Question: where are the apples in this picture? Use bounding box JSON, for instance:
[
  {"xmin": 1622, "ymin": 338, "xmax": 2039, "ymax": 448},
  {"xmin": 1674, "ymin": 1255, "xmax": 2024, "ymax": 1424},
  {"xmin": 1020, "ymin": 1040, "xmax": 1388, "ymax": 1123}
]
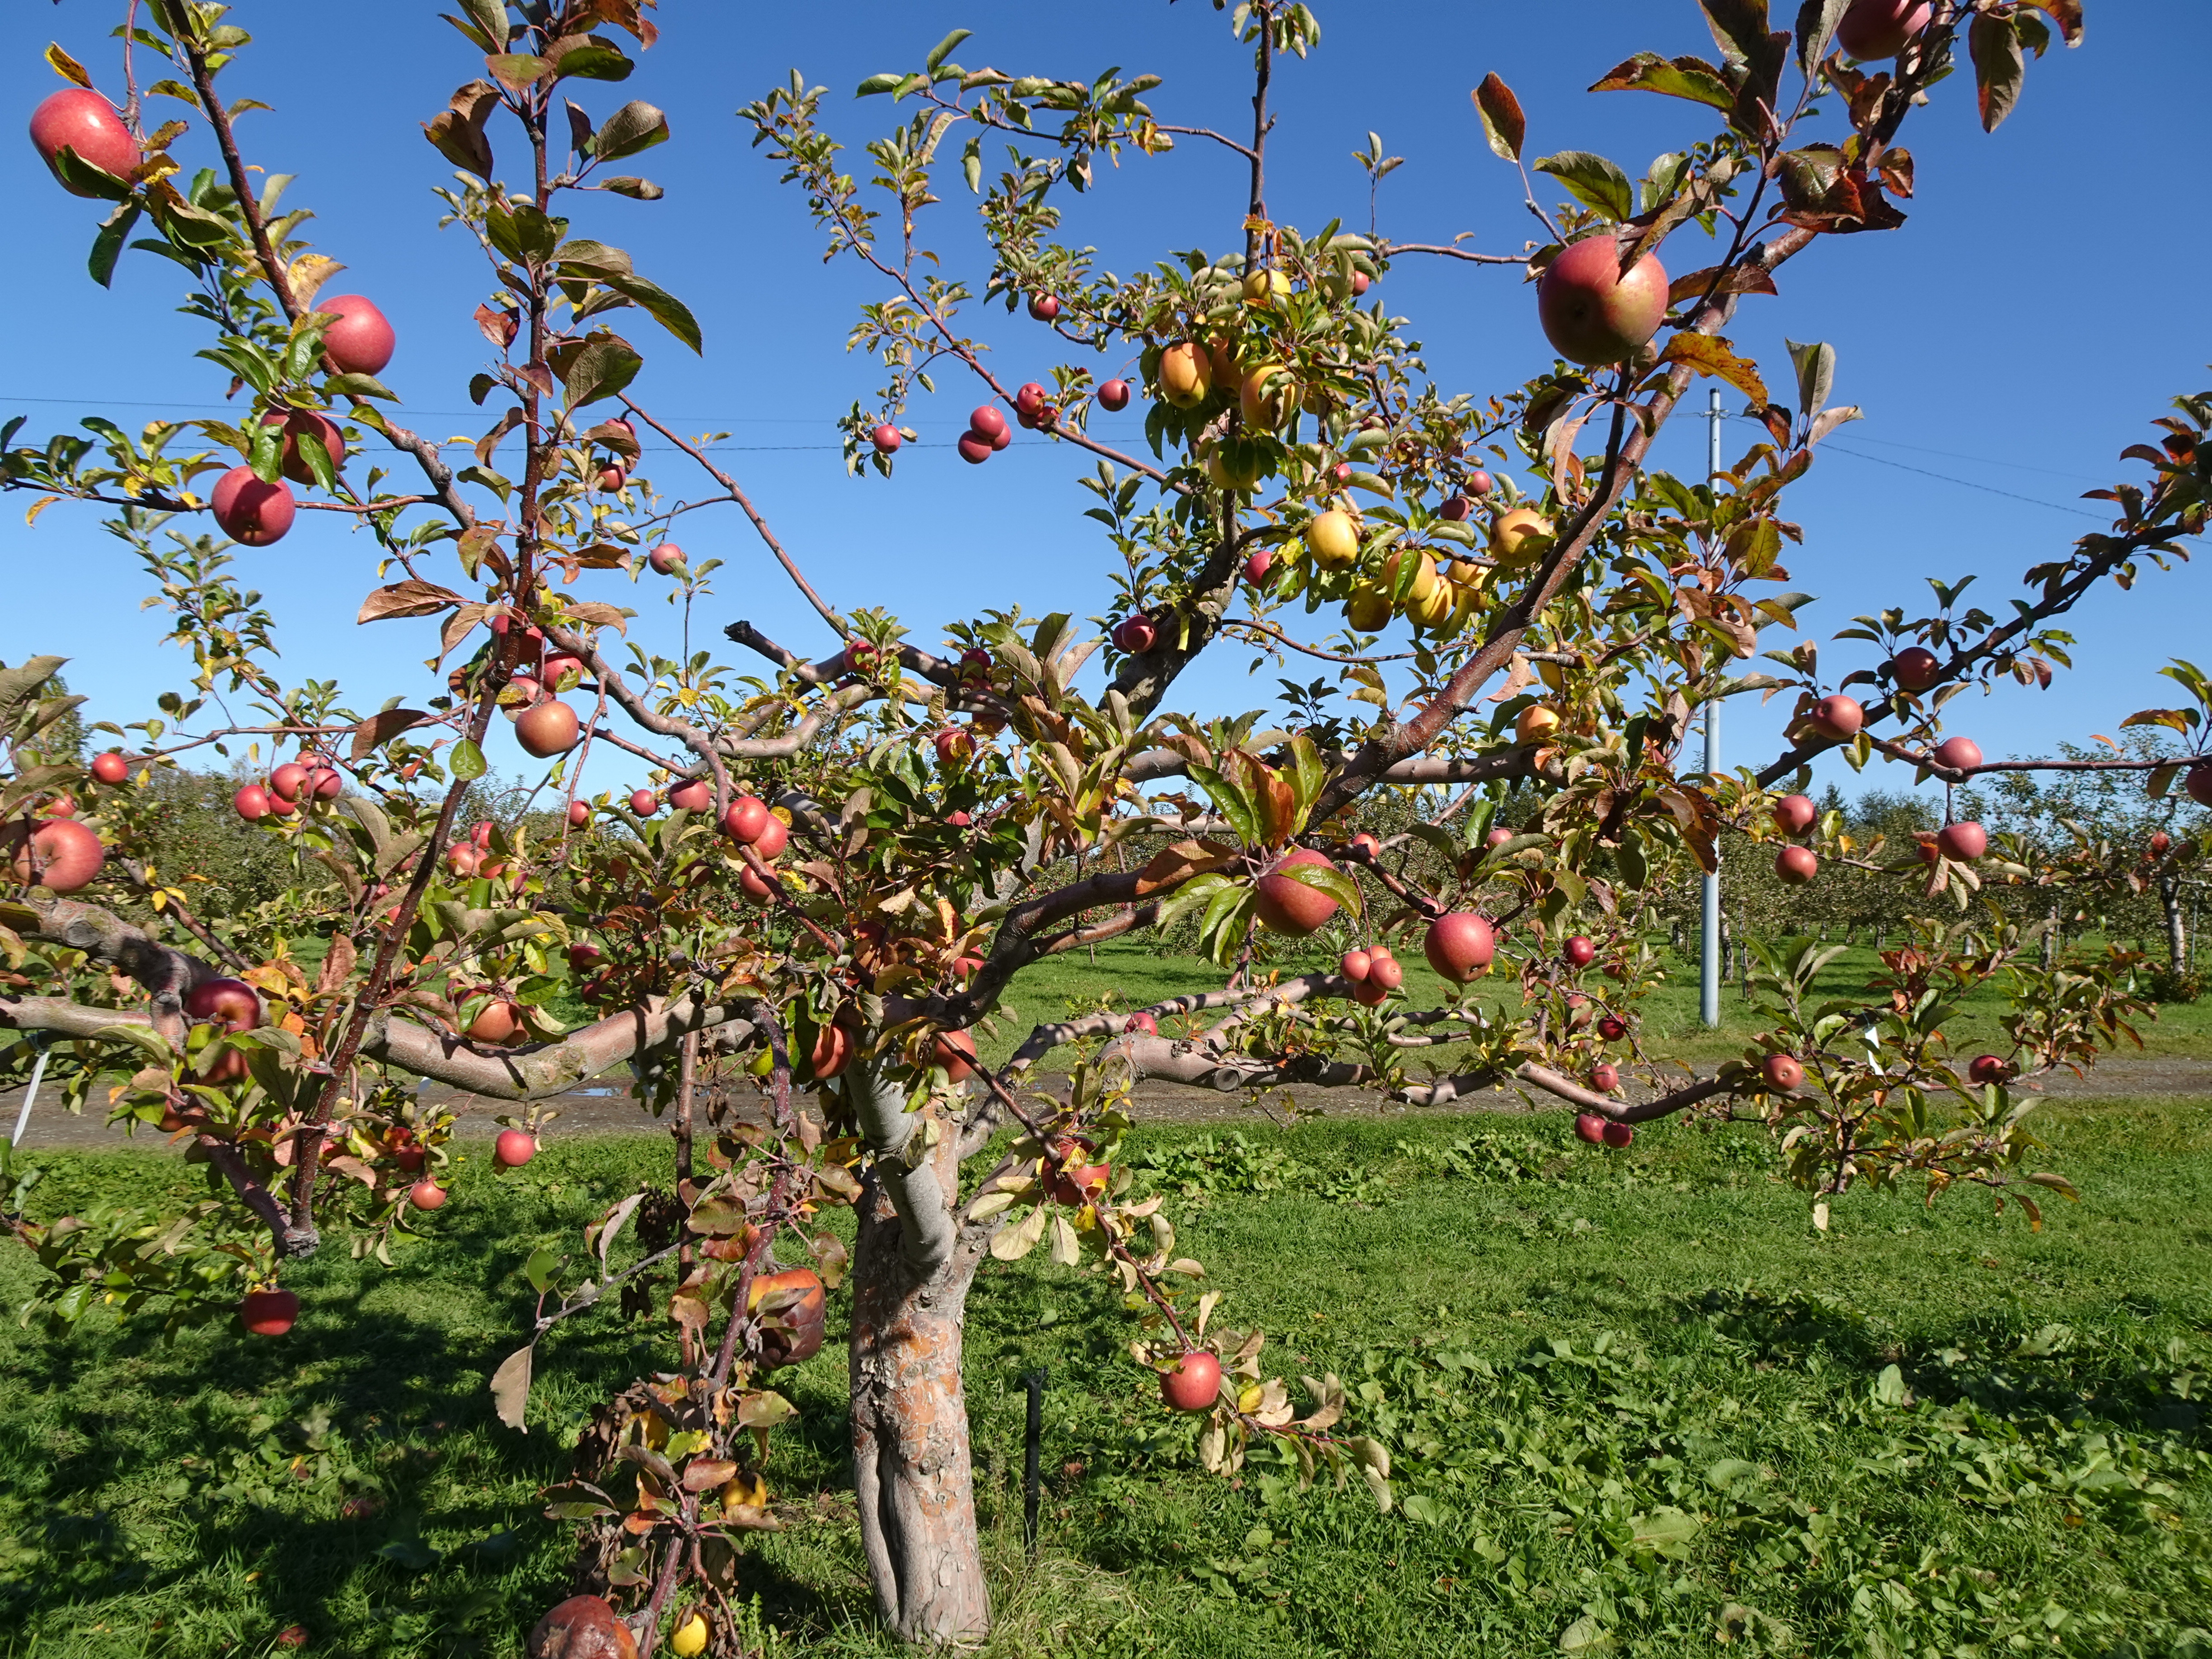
[
  {"xmin": 571, "ymin": 877, "xmax": 601, "ymax": 902},
  {"xmin": 400, "ymin": 852, "xmax": 416, "ymax": 872},
  {"xmin": 953, "ymin": 946, "xmax": 984, "ymax": 982},
  {"xmin": 1256, "ymin": 849, "xmax": 1339, "ymax": 938},
  {"xmin": 960, "ymin": 678, "xmax": 992, "ymax": 692},
  {"xmin": 515, "ymin": 701, "xmax": 579, "ymax": 758},
  {"xmin": 739, "ymin": 862, "xmax": 778, "ymax": 898},
  {"xmin": 1574, "ymin": 1113, "xmax": 1606, "ymax": 1144},
  {"xmin": 201, "ymin": 1048, "xmax": 251, "ymax": 1085},
  {"xmin": 1017, "ymin": 409, "xmax": 1039, "ymax": 429},
  {"xmin": 1307, "ymin": 510, "xmax": 1358, "ymax": 570},
  {"xmin": 1027, "ymin": 290, "xmax": 1058, "ymax": 321},
  {"xmin": 446, "ymin": 979, "xmax": 466, "ymax": 1006},
  {"xmin": 1098, "ymin": 379, "xmax": 1130, "ymax": 412},
  {"xmin": 1562, "ymin": 936, "xmax": 1594, "ymax": 969},
  {"xmin": 725, "ymin": 1472, "xmax": 766, "ymax": 1506},
  {"xmin": 1415, "ymin": 897, "xmax": 1449, "ymax": 914},
  {"xmin": 1811, "ymin": 695, "xmax": 1862, "ymax": 740},
  {"xmin": 1934, "ymin": 737, "xmax": 1982, "ymax": 783},
  {"xmin": 856, "ymin": 920, "xmax": 886, "ymax": 951},
  {"xmin": 1538, "ymin": 235, "xmax": 1676, "ymax": 366},
  {"xmin": 183, "ymin": 978, "xmax": 260, "ymax": 1035},
  {"xmin": 721, "ymin": 1483, "xmax": 761, "ymax": 1515},
  {"xmin": 1386, "ymin": 552, "xmax": 1436, "ymax": 606},
  {"xmin": 593, "ymin": 462, "xmax": 626, "ymax": 493},
  {"xmin": 269, "ymin": 791, "xmax": 298, "ymax": 816},
  {"xmin": 240, "ymin": 1288, "xmax": 299, "ymax": 1335},
  {"xmin": 946, "ymin": 811, "xmax": 970, "ymax": 826},
  {"xmin": 669, "ymin": 779, "xmax": 710, "ymax": 816},
  {"xmin": 500, "ymin": 1002, "xmax": 537, "ymax": 1046},
  {"xmin": 1124, "ymin": 1012, "xmax": 1157, "ymax": 1036},
  {"xmin": 649, "ymin": 543, "xmax": 681, "ymax": 575},
  {"xmin": 319, "ymin": 1121, "xmax": 347, "ymax": 1167},
  {"xmin": 1446, "ymin": 556, "xmax": 1497, "ymax": 613},
  {"xmin": 397, "ymin": 1146, "xmax": 426, "ymax": 1173},
  {"xmin": 1194, "ymin": 312, "xmax": 1229, "ymax": 351},
  {"xmin": 1244, "ymin": 551, "xmax": 1282, "ymax": 590},
  {"xmin": 1424, "ymin": 912, "xmax": 1494, "ymax": 983},
  {"xmin": 836, "ymin": 679, "xmax": 865, "ymax": 710},
  {"xmin": 670, "ymin": 1606, "xmax": 711, "ymax": 1658},
  {"xmin": 1388, "ymin": 431, "xmax": 1418, "ymax": 464},
  {"xmin": 383, "ymin": 1127, "xmax": 412, "ymax": 1153},
  {"xmin": 1113, "ymin": 622, "xmax": 1132, "ymax": 654},
  {"xmin": 154, "ymin": 1100, "xmax": 185, "ymax": 1133},
  {"xmin": 360, "ymin": 881, "xmax": 389, "ymax": 907},
  {"xmin": 524, "ymin": 1594, "xmax": 638, "ymax": 1659},
  {"xmin": 496, "ymin": 1130, "xmax": 534, "ymax": 1167},
  {"xmin": 1036, "ymin": 407, "xmax": 1059, "ymax": 426},
  {"xmin": 1480, "ymin": 915, "xmax": 1501, "ymax": 938},
  {"xmin": 534, "ymin": 648, "xmax": 583, "ymax": 692},
  {"xmin": 1320, "ymin": 463, "xmax": 1352, "ymax": 495},
  {"xmin": 872, "ymin": 425, "xmax": 901, "ymax": 454},
  {"xmin": 1242, "ymin": 269, "xmax": 1291, "ymax": 306},
  {"xmin": 960, "ymin": 649, "xmax": 991, "ymax": 678},
  {"xmin": 1462, "ymin": 471, "xmax": 1490, "ymax": 497},
  {"xmin": 1369, "ymin": 958, "xmax": 1402, "ymax": 990},
  {"xmin": 270, "ymin": 763, "xmax": 312, "ymax": 800},
  {"xmin": 1352, "ymin": 832, "xmax": 1379, "ymax": 857},
  {"xmin": 1487, "ymin": 829, "xmax": 1513, "ymax": 849},
  {"xmin": 1490, "ymin": 507, "xmax": 1513, "ymax": 531},
  {"xmin": 1208, "ymin": 339, "xmax": 1255, "ymax": 397},
  {"xmin": 1489, "ymin": 508, "xmax": 1549, "ymax": 567},
  {"xmin": 679, "ymin": 859, "xmax": 710, "ymax": 885},
  {"xmin": 1969, "ymin": 1055, "xmax": 2004, "ymax": 1086},
  {"xmin": 258, "ymin": 405, "xmax": 346, "ymax": 485},
  {"xmin": 629, "ymin": 789, "xmax": 658, "ymax": 817},
  {"xmin": 1351, "ymin": 270, "xmax": 1369, "ymax": 297},
  {"xmin": 30, "ymin": 87, "xmax": 143, "ymax": 199},
  {"xmin": 1515, "ymin": 704, "xmax": 1563, "ymax": 748},
  {"xmin": 446, "ymin": 842, "xmax": 488, "ymax": 880},
  {"xmin": 45, "ymin": 793, "xmax": 76, "ymax": 818},
  {"xmin": 1602, "ymin": 1122, "xmax": 1631, "ymax": 1148},
  {"xmin": 500, "ymin": 675, "xmax": 556, "ymax": 723},
  {"xmin": 10, "ymin": 818, "xmax": 103, "ymax": 895},
  {"xmin": 295, "ymin": 750, "xmax": 330, "ymax": 771},
  {"xmin": 604, "ymin": 418, "xmax": 635, "ymax": 438},
  {"xmin": 750, "ymin": 813, "xmax": 787, "ymax": 862},
  {"xmin": 92, "ymin": 753, "xmax": 128, "ymax": 785},
  {"xmin": 481, "ymin": 864, "xmax": 505, "ymax": 879},
  {"xmin": 569, "ymin": 801, "xmax": 592, "ymax": 827},
  {"xmin": 1017, "ymin": 383, "xmax": 1046, "ymax": 415},
  {"xmin": 620, "ymin": 980, "xmax": 635, "ymax": 997},
  {"xmin": 1122, "ymin": 615, "xmax": 1157, "ymax": 652},
  {"xmin": 307, "ymin": 765, "xmax": 341, "ymax": 802},
  {"xmin": 1597, "ymin": 1014, "xmax": 1625, "ymax": 1042},
  {"xmin": 1609, "ymin": 933, "xmax": 1627, "ymax": 953},
  {"xmin": 1762, "ymin": 1054, "xmax": 1802, "ymax": 1092},
  {"xmin": 1363, "ymin": 945, "xmax": 1393, "ymax": 962},
  {"xmin": 1159, "ymin": 342, "xmax": 1211, "ymax": 408},
  {"xmin": 1347, "ymin": 578, "xmax": 1393, "ymax": 631},
  {"xmin": 1405, "ymin": 573, "xmax": 1452, "ymax": 629},
  {"xmin": 313, "ymin": 295, "xmax": 395, "ymax": 377},
  {"xmin": 470, "ymin": 821, "xmax": 492, "ymax": 849},
  {"xmin": 1835, "ymin": 0, "xmax": 1930, "ymax": 62},
  {"xmin": 746, "ymin": 1270, "xmax": 825, "ymax": 1370},
  {"xmin": 812, "ymin": 1023, "xmax": 854, "ymax": 1080},
  {"xmin": 513, "ymin": 869, "xmax": 529, "ymax": 896},
  {"xmin": 568, "ymin": 946, "xmax": 600, "ymax": 974},
  {"xmin": 1160, "ymin": 1351, "xmax": 1221, "ymax": 1411},
  {"xmin": 843, "ymin": 641, "xmax": 879, "ymax": 674},
  {"xmin": 936, "ymin": 727, "xmax": 976, "ymax": 764},
  {"xmin": 1041, "ymin": 1137, "xmax": 1110, "ymax": 1206},
  {"xmin": 1340, "ymin": 951, "xmax": 1371, "ymax": 983},
  {"xmin": 1098, "ymin": 794, "xmax": 1117, "ymax": 815},
  {"xmin": 1566, "ymin": 995, "xmax": 1592, "ymax": 1028},
  {"xmin": 744, "ymin": 892, "xmax": 777, "ymax": 907},
  {"xmin": 1892, "ymin": 647, "xmax": 1938, "ymax": 690},
  {"xmin": 410, "ymin": 1176, "xmax": 447, "ymax": 1211},
  {"xmin": 1241, "ymin": 364, "xmax": 1303, "ymax": 430},
  {"xmin": 1588, "ymin": 1064, "xmax": 1618, "ymax": 1093},
  {"xmin": 725, "ymin": 796, "xmax": 768, "ymax": 842},
  {"xmin": 234, "ymin": 785, "xmax": 274, "ymax": 822},
  {"xmin": 581, "ymin": 980, "xmax": 608, "ymax": 1006},
  {"xmin": 1937, "ymin": 821, "xmax": 1986, "ymax": 862},
  {"xmin": 972, "ymin": 712, "xmax": 1006, "ymax": 733},
  {"xmin": 456, "ymin": 985, "xmax": 519, "ymax": 1043},
  {"xmin": 1601, "ymin": 954, "xmax": 1627, "ymax": 979},
  {"xmin": 1208, "ymin": 437, "xmax": 1257, "ymax": 490},
  {"xmin": 1354, "ymin": 976, "xmax": 1387, "ymax": 1007},
  {"xmin": 1439, "ymin": 498, "xmax": 1468, "ymax": 521},
  {"xmin": 211, "ymin": 466, "xmax": 295, "ymax": 547},
  {"xmin": 931, "ymin": 1030, "xmax": 976, "ymax": 1084},
  {"xmin": 1539, "ymin": 640, "xmax": 1572, "ymax": 692},
  {"xmin": 2064, "ymin": 1506, "xmax": 2083, "ymax": 1527},
  {"xmin": 970, "ymin": 406, "xmax": 1004, "ymax": 439},
  {"xmin": 1335, "ymin": 368, "xmax": 1353, "ymax": 401},
  {"xmin": 828, "ymin": 967, "xmax": 860, "ymax": 988},
  {"xmin": 1358, "ymin": 413, "xmax": 1390, "ymax": 434},
  {"xmin": 387, "ymin": 905, "xmax": 402, "ymax": 925},
  {"xmin": 958, "ymin": 430, "xmax": 992, "ymax": 464},
  {"xmin": 491, "ymin": 612, "xmax": 545, "ymax": 664},
  {"xmin": 1770, "ymin": 795, "xmax": 1817, "ymax": 838},
  {"xmin": 989, "ymin": 422, "xmax": 1011, "ymax": 451},
  {"xmin": 1775, "ymin": 847, "xmax": 1817, "ymax": 885},
  {"xmin": 2186, "ymin": 768, "xmax": 2212, "ymax": 808}
]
